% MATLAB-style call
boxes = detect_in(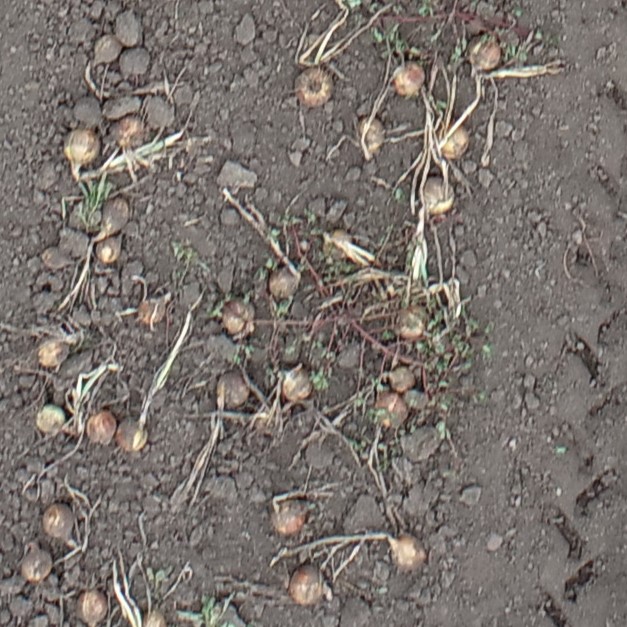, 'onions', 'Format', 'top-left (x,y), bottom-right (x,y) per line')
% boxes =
(265, 366), (288, 391)
(390, 534), (424, 573)
(391, 64), (422, 95)
(138, 298), (165, 327)
(283, 370), (311, 400)
(217, 298), (253, 336)
(327, 231), (354, 260)
(37, 337), (65, 368)
(386, 365), (415, 393)
(296, 68), (331, 107)
(437, 128), (468, 158)
(287, 565), (325, 606)
(62, 127), (100, 165)
(468, 36), (501, 70)
(86, 412), (116, 443)
(266, 268), (298, 299)
(39, 503), (72, 539)
(270, 495), (306, 535)
(356, 118), (384, 150)
(110, 114), (145, 152)
(94, 236), (122, 264)
(120, 46), (151, 80)
(276, 333), (303, 361)
(39, 246), (65, 269)
(372, 396), (408, 429)
(36, 401), (65, 432)
(70, 199), (100, 232)
(103, 199), (130, 228)
(214, 370), (251, 409)
(122, 424), (147, 452)
(395, 308), (424, 339)
(304, 339), (332, 366)
(75, 590), (105, 619)
(138, 608), (167, 626)
(93, 35), (122, 63)
(419, 177), (452, 214)
(113, 14), (141, 45)
(16, 544), (51, 582)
